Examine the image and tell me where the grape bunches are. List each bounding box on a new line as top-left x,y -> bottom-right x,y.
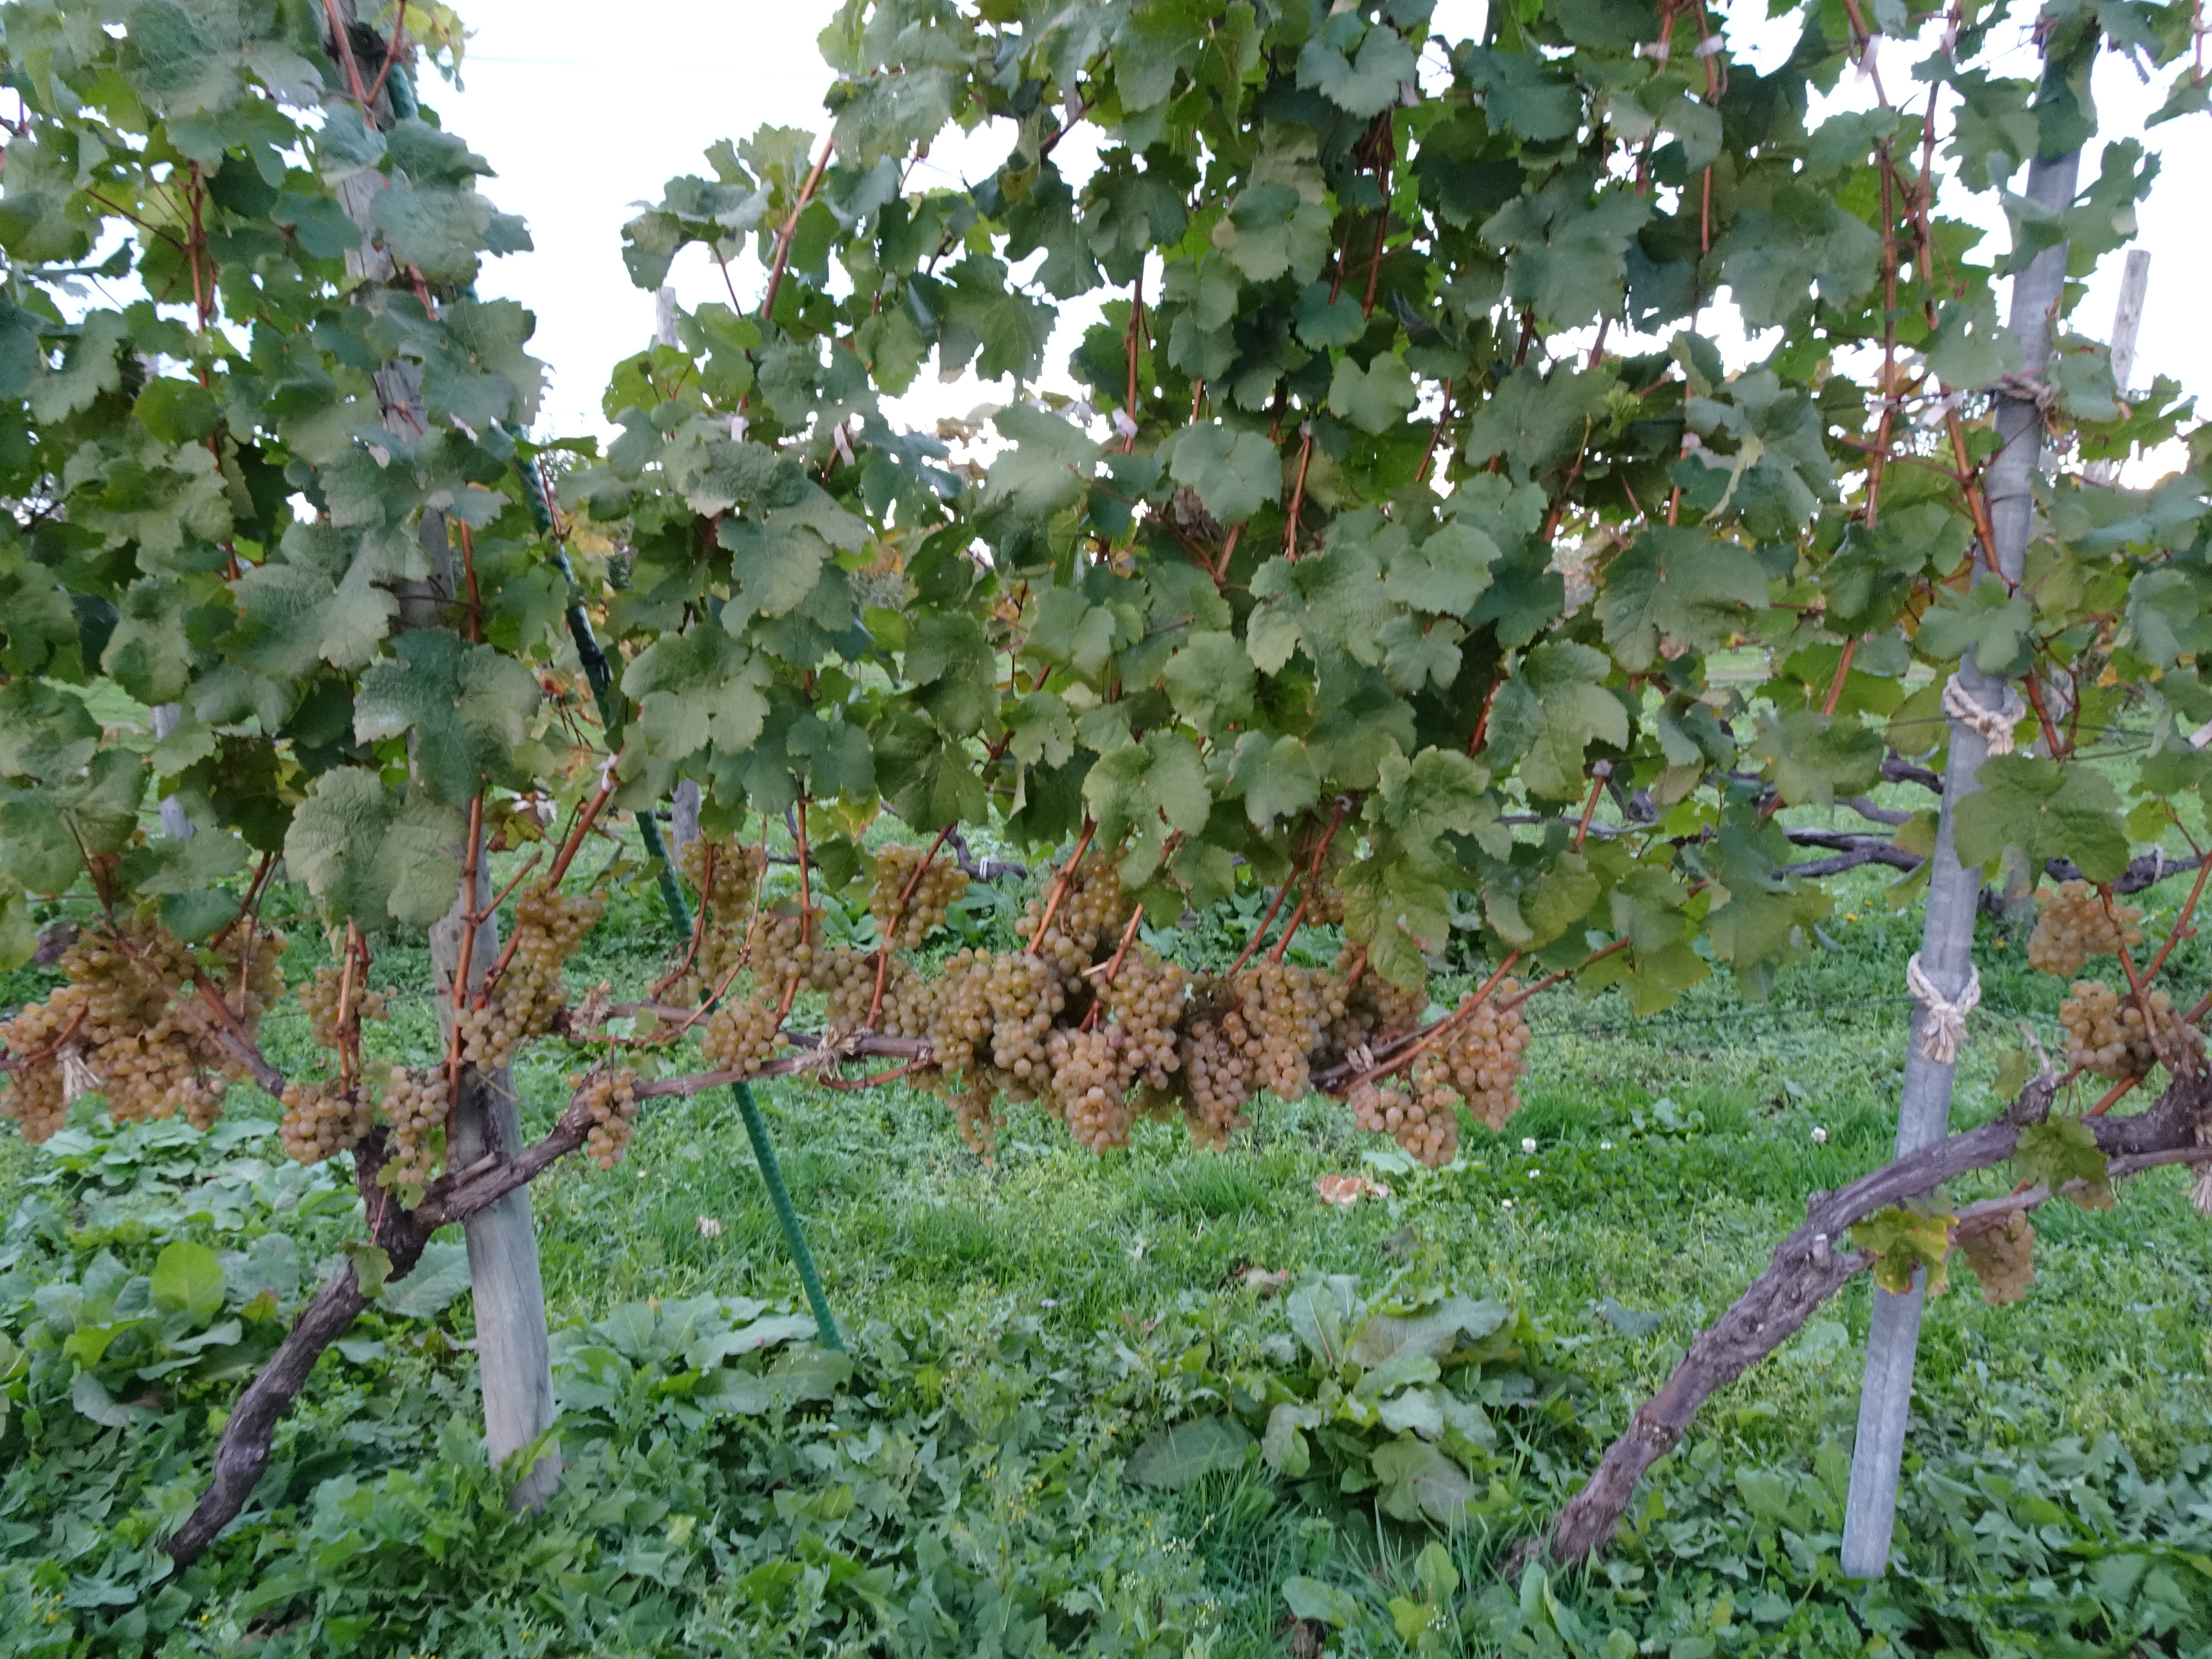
513,869 -> 610,991
930,1082 -> 1014,1171
122,1022 -> 185,1124
680,828 -> 765,928
1415,979 -> 1537,1133
1254,1033 -> 1324,1104
274,1076 -> 351,1167
43,943 -> 150,1030
2060,979 -> 2170,1077
877,959 -> 934,1041
219,980 -> 268,1049
1182,966 -> 1244,1019
925,940 -> 999,1078
992,950 -> 1067,1074
379,1065 -> 454,1186
901,855 -> 972,950
1,1001 -> 57,1055
1095,935 -> 1193,1088
1053,1029 -> 1141,1159
449,1000 -> 518,1077
298,963 -> 369,1045
240,915 -> 293,1015
1345,1076 -> 1428,1134
145,924 -> 220,1039
994,1066 -> 1072,1108
869,841 -> 923,950
352,982 -> 396,1021
565,1069 -> 637,1170
1962,1209 -> 2040,1304
2,1057 -> 73,1146
687,927 -> 743,991
1295,874 -> 1349,930
814,942 -> 876,1033
86,1024 -> 136,1125
1386,1091 -> 1474,1169
1176,1019 -> 1257,1155
179,1032 -> 260,1135
646,968 -> 700,1051
342,1052 -> 398,1143
1010,897 -> 1100,995
1234,959 -> 1372,1057
1361,963 -> 1433,1030
494,970 -> 575,1043
1036,845 -> 1134,934
2027,877 -> 2145,979
748,918 -> 826,1003
700,996 -> 787,1077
